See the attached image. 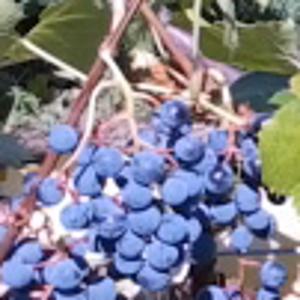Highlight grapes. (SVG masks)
Instances as JSON below:
<instances>
[{
    "instance_id": "grapes-1",
    "label": "grapes",
    "mask_w": 300,
    "mask_h": 300,
    "mask_svg": "<svg viewBox=\"0 0 300 300\" xmlns=\"http://www.w3.org/2000/svg\"><path fill=\"white\" fill-rule=\"evenodd\" d=\"M268 111L255 113L236 134L243 162V182L223 152L227 130L210 131L207 142L195 132L194 116L180 97H168L151 113V127L134 136L125 153L88 141L81 149L73 191L87 200L66 203L59 211L65 233L87 232L88 241L47 259L37 236L11 246L0 261V285L15 297L33 288H50L52 300H112L116 282L133 280L152 293L163 292L171 271L183 261L208 265L216 240L207 230L230 225V245L250 251L257 240L278 231V218L262 207L258 150Z\"/></svg>"
},
{
    "instance_id": "grapes-2",
    "label": "grapes",
    "mask_w": 300,
    "mask_h": 300,
    "mask_svg": "<svg viewBox=\"0 0 300 300\" xmlns=\"http://www.w3.org/2000/svg\"><path fill=\"white\" fill-rule=\"evenodd\" d=\"M23 192L26 195L33 193L37 208L55 207L66 197V188L57 178H41L38 171H29L23 176Z\"/></svg>"
},
{
    "instance_id": "grapes-3",
    "label": "grapes",
    "mask_w": 300,
    "mask_h": 300,
    "mask_svg": "<svg viewBox=\"0 0 300 300\" xmlns=\"http://www.w3.org/2000/svg\"><path fill=\"white\" fill-rule=\"evenodd\" d=\"M260 285L255 300H280V291L290 281L289 268L277 260L266 261L260 269Z\"/></svg>"
},
{
    "instance_id": "grapes-4",
    "label": "grapes",
    "mask_w": 300,
    "mask_h": 300,
    "mask_svg": "<svg viewBox=\"0 0 300 300\" xmlns=\"http://www.w3.org/2000/svg\"><path fill=\"white\" fill-rule=\"evenodd\" d=\"M79 140L80 132L68 124H53L46 133V147L57 154H70Z\"/></svg>"
},
{
    "instance_id": "grapes-5",
    "label": "grapes",
    "mask_w": 300,
    "mask_h": 300,
    "mask_svg": "<svg viewBox=\"0 0 300 300\" xmlns=\"http://www.w3.org/2000/svg\"><path fill=\"white\" fill-rule=\"evenodd\" d=\"M194 300H242L238 289L228 290L215 282H205L193 290Z\"/></svg>"
}]
</instances>
